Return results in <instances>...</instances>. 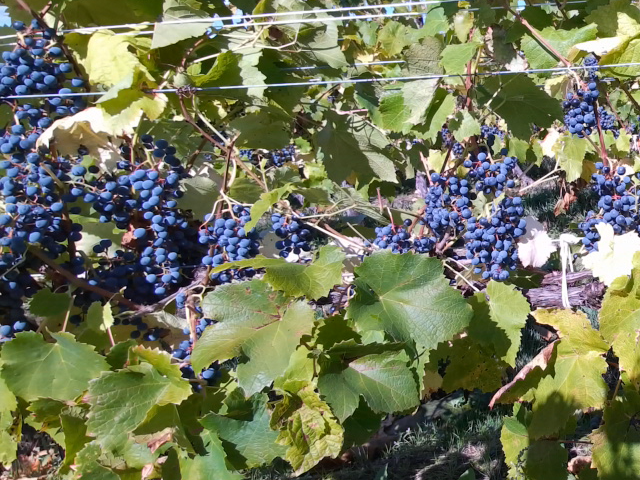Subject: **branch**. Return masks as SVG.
Here are the masks:
<instances>
[{
	"label": "branch",
	"instance_id": "30e6481e",
	"mask_svg": "<svg viewBox=\"0 0 640 480\" xmlns=\"http://www.w3.org/2000/svg\"><path fill=\"white\" fill-rule=\"evenodd\" d=\"M68 247H69V266H68V270L63 268L61 265L57 264L54 260H52L51 258H49L48 256L44 255L36 246H34L31 243H28L26 245V248L31 251L40 261L44 262L46 265H49L52 269H54L55 271H57L59 274L65 276L66 278L72 280V282L83 288L86 290H91L94 291L95 293H98L102 296H105L107 298H111L113 300L119 301L121 303H123L124 305L132 308L133 310H135L137 313H147V312H152L153 310L158 309L159 307L164 306L165 304H169L172 303L175 300V297L180 294L183 293L184 295L190 291L192 288H195L196 286H200L201 284H203L204 286H207L210 280V272L212 270V265L208 264L207 268L205 269V277L204 276H200L197 279H194L193 281H190L188 284H186L183 288H181L178 292L167 296V297H163L160 300H157L154 303H151L150 305H145V306H139L136 302L128 299L126 296L115 293L113 291H109L105 288H102L100 286H97L96 284L93 283H88L85 282L81 279H79L74 273H72V268H74V264H72V259H74V257H76V253H77V246L74 242H72L71 240H68Z\"/></svg>",
	"mask_w": 640,
	"mask_h": 480
},
{
	"label": "branch",
	"instance_id": "325d2c04",
	"mask_svg": "<svg viewBox=\"0 0 640 480\" xmlns=\"http://www.w3.org/2000/svg\"><path fill=\"white\" fill-rule=\"evenodd\" d=\"M177 100H178V104L181 107V111L183 113V116L185 118V120L190 124L191 127H193L196 132L210 145H212L213 147H215L216 149H218L219 151H221L222 153H224L225 155H227V160H226V164H225V171L223 173V179H222V185L220 188V201H219V205H218V210L216 213V217L220 218L222 216L223 213V207H224V203H225V190L227 188V181H228V176L230 173V167H231V162H232V158L235 162H237L243 169H245V171L252 177V179L255 181V183L257 184V187L262 191L265 192L266 191V187L264 185H262V182L260 181V179L257 177V175L255 174V172L245 163L243 162L234 152H233V143L229 142L228 143V149H226L225 147H223L222 145L218 144L215 140L211 139L210 137H208L203 130H201V128L198 126L197 123L194 122V120L192 118H190L185 102L183 101V97L181 95L177 96Z\"/></svg>",
	"mask_w": 640,
	"mask_h": 480
},
{
	"label": "branch",
	"instance_id": "170604dd",
	"mask_svg": "<svg viewBox=\"0 0 640 480\" xmlns=\"http://www.w3.org/2000/svg\"><path fill=\"white\" fill-rule=\"evenodd\" d=\"M519 23L522 24L524 27H526L527 29H529L540 41V43L545 47L548 48V50L551 52V54L556 57V59L558 61H560L562 64L564 65H572L571 62H569L568 60H566L563 56H561L554 48L553 46L548 43L543 35L537 30L535 29L531 24H529L525 19L520 18L519 19Z\"/></svg>",
	"mask_w": 640,
	"mask_h": 480
},
{
	"label": "branch",
	"instance_id": "45aa463d",
	"mask_svg": "<svg viewBox=\"0 0 640 480\" xmlns=\"http://www.w3.org/2000/svg\"><path fill=\"white\" fill-rule=\"evenodd\" d=\"M592 107H593L594 114H595V119H596L597 133H598V137L600 139V146H601V151H602L603 164L607 165L608 164L607 148H606V144H605V137H604V134H603V131H602L600 111H599V108H598V105H597L596 101L592 102Z\"/></svg>",
	"mask_w": 640,
	"mask_h": 480
},
{
	"label": "branch",
	"instance_id": "982ccf7c",
	"mask_svg": "<svg viewBox=\"0 0 640 480\" xmlns=\"http://www.w3.org/2000/svg\"><path fill=\"white\" fill-rule=\"evenodd\" d=\"M53 2H54V0H48L47 3L45 4V6L42 8V10L37 15L32 9H30V7L26 4V2L24 0H18V3L23 7V9L29 15H31L34 20L39 22L44 28L48 27V23L45 22L42 19V17L46 14L47 10L50 8V6L52 5Z\"/></svg>",
	"mask_w": 640,
	"mask_h": 480
},
{
	"label": "branch",
	"instance_id": "1ff4a987",
	"mask_svg": "<svg viewBox=\"0 0 640 480\" xmlns=\"http://www.w3.org/2000/svg\"><path fill=\"white\" fill-rule=\"evenodd\" d=\"M52 39L54 40V42L56 43L58 49L64 54V56L69 60V62L72 64L75 73L78 75L79 78L83 77V72L80 70L78 63L75 61V59L73 58V56L71 54H69V51L62 45L60 39L57 37L56 34L52 35Z\"/></svg>",
	"mask_w": 640,
	"mask_h": 480
},
{
	"label": "branch",
	"instance_id": "ea751061",
	"mask_svg": "<svg viewBox=\"0 0 640 480\" xmlns=\"http://www.w3.org/2000/svg\"><path fill=\"white\" fill-rule=\"evenodd\" d=\"M306 221L309 222V223H318L319 219L318 218L307 217ZM319 225H320L321 228L328 230L329 232L335 234L336 236H338L340 238H343L344 240H348L347 236H345L343 233H341L337 229L333 228L331 225L325 224L323 221H320Z\"/></svg>",
	"mask_w": 640,
	"mask_h": 480
},
{
	"label": "branch",
	"instance_id": "ca6c30ca",
	"mask_svg": "<svg viewBox=\"0 0 640 480\" xmlns=\"http://www.w3.org/2000/svg\"><path fill=\"white\" fill-rule=\"evenodd\" d=\"M208 38L207 34H204L199 40L198 42H196L188 51H186L183 54V57L181 59L180 65L184 66L187 62L188 57L195 52V50H197Z\"/></svg>",
	"mask_w": 640,
	"mask_h": 480
},
{
	"label": "branch",
	"instance_id": "1d269e1b",
	"mask_svg": "<svg viewBox=\"0 0 640 480\" xmlns=\"http://www.w3.org/2000/svg\"><path fill=\"white\" fill-rule=\"evenodd\" d=\"M455 141H456V138H455V137H452V138L450 139V142H449L448 148L446 149V152L444 153L443 159H442L441 164H440V167H439V172H440V173H443V172H444L445 166H446V164H447V162H448V159H449V155L451 154V152H452V150H453V147H454Z\"/></svg>",
	"mask_w": 640,
	"mask_h": 480
},
{
	"label": "branch",
	"instance_id": "1af6ec82",
	"mask_svg": "<svg viewBox=\"0 0 640 480\" xmlns=\"http://www.w3.org/2000/svg\"><path fill=\"white\" fill-rule=\"evenodd\" d=\"M426 210H427V206H426V205H423V206H422V208H420V209L416 212V215H415V216L413 217V219L411 220V221H412V225L407 227V232H408V233H411V232H412V229H413L414 225H415V224H416V222L419 220V218L421 217V215H422L423 213H425V212H426Z\"/></svg>",
	"mask_w": 640,
	"mask_h": 480
},
{
	"label": "branch",
	"instance_id": "2b1400db",
	"mask_svg": "<svg viewBox=\"0 0 640 480\" xmlns=\"http://www.w3.org/2000/svg\"><path fill=\"white\" fill-rule=\"evenodd\" d=\"M61 220L62 221H66V223H68V230H69V232H72V227H71L72 220H70V218H69V211H68V205L67 204H64V210L61 213Z\"/></svg>",
	"mask_w": 640,
	"mask_h": 480
},
{
	"label": "branch",
	"instance_id": "8bde2521",
	"mask_svg": "<svg viewBox=\"0 0 640 480\" xmlns=\"http://www.w3.org/2000/svg\"><path fill=\"white\" fill-rule=\"evenodd\" d=\"M33 27L29 26L23 33V35L21 36V38L18 41V44L15 45L16 49H20L21 46L23 45L24 41L26 40V38L28 37V35L32 32Z\"/></svg>",
	"mask_w": 640,
	"mask_h": 480
}]
</instances>
